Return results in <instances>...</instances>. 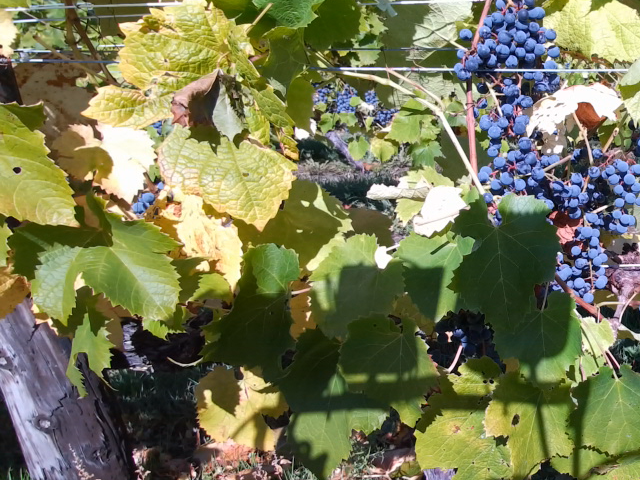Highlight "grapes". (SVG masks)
<instances>
[{
	"mask_svg": "<svg viewBox=\"0 0 640 480\" xmlns=\"http://www.w3.org/2000/svg\"><path fill=\"white\" fill-rule=\"evenodd\" d=\"M503 84L505 86L496 85L494 90L498 94H504L507 100L500 107V112L504 116H499L496 120L489 114H482L480 116L479 109H485L488 106V101L485 98H479L477 100L475 111V119L479 120V128L482 131H487V135L492 138L490 145L486 150V154L492 159V167L494 169L503 170L506 167V161L508 163H516V172L520 175H528L531 177L525 181L523 178L518 177L514 179V175L509 171H503L500 174V179H492L489 183L490 192L483 194V201L485 203H491L494 195L505 196L509 189L505 186H509L512 190L522 191L527 187L533 189V194L538 200H542L546 203L549 209H553L555 204L553 203V197L559 199L560 203L557 205V210L560 213H568L572 220H580L582 218V211L587 213L585 219L591 226L578 227L574 238L576 240L586 241L591 249L582 251L578 245H574L571 248V254L577 256L575 260V266L570 267L564 262V254L558 252L556 254V262L562 264L554 268V273L558 274L562 280L567 284L569 289L581 298L586 303H592L594 301V294L591 292L592 284L580 277L582 270H587L590 267V259H593L594 272L593 285L599 289L604 290L609 283V277L606 274V270L603 266L608 260L609 256L603 253L600 246V230L616 231L621 234H626L628 228H633L638 224V219L634 215H627L620 210H614L611 215L604 214L602 212L590 213L594 211L600 204H604L607 200V196L600 192L599 185L595 181L588 183L586 192H582V188L585 186L584 178H597L602 177L606 179L611 185H616L613 188V193L619 195L614 200V206L618 209L627 206L640 207V197H636L640 193V183H637L636 177L640 178V164L630 165L628 162L616 159L614 164H609L605 169L601 170L598 166H590L587 171L581 173H573L568 185L562 180H554L551 183V189L553 190V197L549 194V191L545 185H539L546 175V170L550 165L556 164L560 161V157L557 154H544L541 159H538L537 153L532 151L533 141L529 137L520 136L517 140V149L510 150L506 154V159L500 156L501 141L504 129L509 126V121L506 117H511L514 113V106L518 105L522 109H529L534 105V99L527 94L520 95V88L517 86V81L511 79L508 76L503 78Z\"/></svg>",
	"mask_w": 640,
	"mask_h": 480,
	"instance_id": "01657485",
	"label": "grapes"
},
{
	"mask_svg": "<svg viewBox=\"0 0 640 480\" xmlns=\"http://www.w3.org/2000/svg\"><path fill=\"white\" fill-rule=\"evenodd\" d=\"M517 8L527 5L529 9L506 8V0H496V11L487 15L479 35L484 43L476 45V53L468 55L464 66L456 63L453 72L459 81H467L477 68H499L501 64L508 68H516L518 59L521 67H535L538 57L547 54L550 58L560 56V47L551 45L546 51L542 45L546 41H555L557 33L553 29L541 26L546 16L543 7H535L536 0H513Z\"/></svg>",
	"mask_w": 640,
	"mask_h": 480,
	"instance_id": "b958b902",
	"label": "grapes"
},
{
	"mask_svg": "<svg viewBox=\"0 0 640 480\" xmlns=\"http://www.w3.org/2000/svg\"><path fill=\"white\" fill-rule=\"evenodd\" d=\"M521 77L527 82L533 81L538 93L554 94L561 89V77L557 73L525 72Z\"/></svg>",
	"mask_w": 640,
	"mask_h": 480,
	"instance_id": "0513c4c2",
	"label": "grapes"
},
{
	"mask_svg": "<svg viewBox=\"0 0 640 480\" xmlns=\"http://www.w3.org/2000/svg\"><path fill=\"white\" fill-rule=\"evenodd\" d=\"M587 156V151L584 147L576 148L572 154L571 162L576 164L578 159H584Z\"/></svg>",
	"mask_w": 640,
	"mask_h": 480,
	"instance_id": "84f90ec7",
	"label": "grapes"
}]
</instances>
